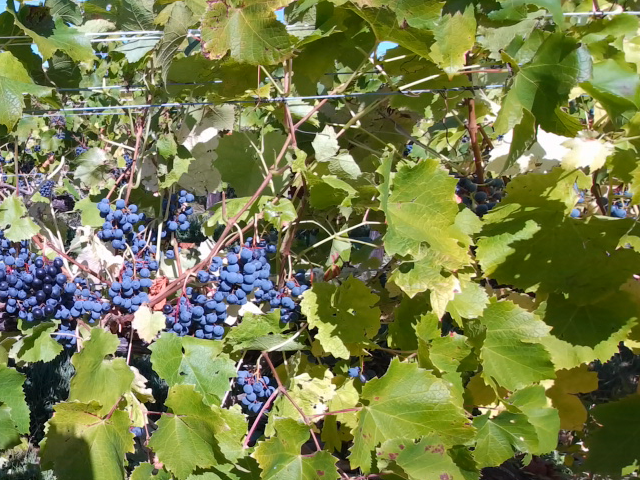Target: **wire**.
<instances>
[{"instance_id": "d2f4af69", "label": "wire", "mask_w": 640, "mask_h": 480, "mask_svg": "<svg viewBox=\"0 0 640 480\" xmlns=\"http://www.w3.org/2000/svg\"><path fill=\"white\" fill-rule=\"evenodd\" d=\"M500 83H486V84H469L464 87L453 88H405V89H392V90H370L360 92L340 93L333 95H320V94H302V95H286V96H271L261 98H246V99H227L223 100V105L239 104L244 105L248 103H263L273 101H289V100H304V99H318V100H336L342 98L363 97L372 95H394V94H407V93H455L466 92L471 89H488V88H500Z\"/></svg>"}, {"instance_id": "a73af890", "label": "wire", "mask_w": 640, "mask_h": 480, "mask_svg": "<svg viewBox=\"0 0 640 480\" xmlns=\"http://www.w3.org/2000/svg\"><path fill=\"white\" fill-rule=\"evenodd\" d=\"M212 107V102L204 101H185V102H164V103H135V104H112V105H100L92 107L82 106H57V107H41L37 109H25V114H39L43 112H59V111H80V112H94L102 110H114V109H138V108H166V107Z\"/></svg>"}, {"instance_id": "4f2155b8", "label": "wire", "mask_w": 640, "mask_h": 480, "mask_svg": "<svg viewBox=\"0 0 640 480\" xmlns=\"http://www.w3.org/2000/svg\"><path fill=\"white\" fill-rule=\"evenodd\" d=\"M164 29H147V30H111L106 32H91L86 31L85 35L89 37H107L90 39V44L98 43H110V42H133V41H161L162 37L159 35L150 36H131V37H109L114 35H149V34H164Z\"/></svg>"}, {"instance_id": "f0478fcc", "label": "wire", "mask_w": 640, "mask_h": 480, "mask_svg": "<svg viewBox=\"0 0 640 480\" xmlns=\"http://www.w3.org/2000/svg\"><path fill=\"white\" fill-rule=\"evenodd\" d=\"M562 15L567 17H579L583 15L640 16V11L580 10L576 12L563 11Z\"/></svg>"}, {"instance_id": "a009ed1b", "label": "wire", "mask_w": 640, "mask_h": 480, "mask_svg": "<svg viewBox=\"0 0 640 480\" xmlns=\"http://www.w3.org/2000/svg\"><path fill=\"white\" fill-rule=\"evenodd\" d=\"M163 204H164V194L160 193L159 194V201H158V226H157V231H156V237H155V260L157 262L161 261V257H160V249H161V234H162V229H163Z\"/></svg>"}]
</instances>
